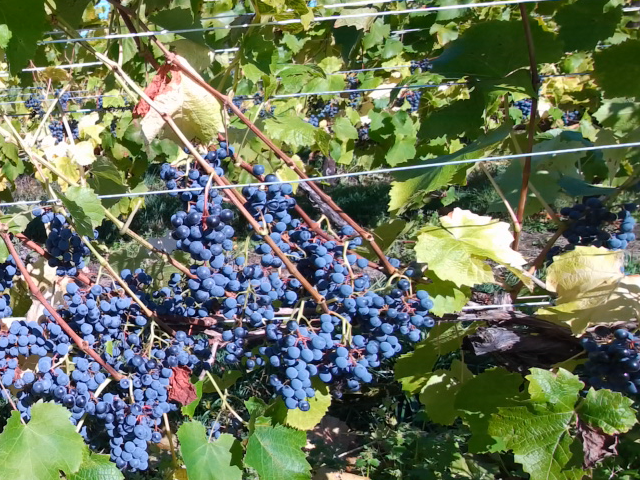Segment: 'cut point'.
Here are the masks:
<instances>
[{
    "label": "cut point",
    "mask_w": 640,
    "mask_h": 480,
    "mask_svg": "<svg viewBox=\"0 0 640 480\" xmlns=\"http://www.w3.org/2000/svg\"><path fill=\"white\" fill-rule=\"evenodd\" d=\"M352 245L350 240H346L343 245H342V249H341V261L343 263L344 268L347 271H350L352 269V266L347 262L346 260V255L348 254V250L349 247Z\"/></svg>",
    "instance_id": "obj_3"
},
{
    "label": "cut point",
    "mask_w": 640,
    "mask_h": 480,
    "mask_svg": "<svg viewBox=\"0 0 640 480\" xmlns=\"http://www.w3.org/2000/svg\"><path fill=\"white\" fill-rule=\"evenodd\" d=\"M256 234L257 232L254 229H249L246 232L245 238H244V244H243V252L245 254H248L250 252L251 240H252V237L255 236Z\"/></svg>",
    "instance_id": "obj_5"
},
{
    "label": "cut point",
    "mask_w": 640,
    "mask_h": 480,
    "mask_svg": "<svg viewBox=\"0 0 640 480\" xmlns=\"http://www.w3.org/2000/svg\"><path fill=\"white\" fill-rule=\"evenodd\" d=\"M329 315H335L340 320V322L342 323V329H341L340 335L342 337H345L349 332V322H347L345 318L342 316V314H340L336 310L330 311Z\"/></svg>",
    "instance_id": "obj_4"
},
{
    "label": "cut point",
    "mask_w": 640,
    "mask_h": 480,
    "mask_svg": "<svg viewBox=\"0 0 640 480\" xmlns=\"http://www.w3.org/2000/svg\"><path fill=\"white\" fill-rule=\"evenodd\" d=\"M405 280L407 281L409 279V277L406 275V273H401L398 272L397 270H394L385 280V288L387 290H390L392 288V282L394 280Z\"/></svg>",
    "instance_id": "obj_1"
},
{
    "label": "cut point",
    "mask_w": 640,
    "mask_h": 480,
    "mask_svg": "<svg viewBox=\"0 0 640 480\" xmlns=\"http://www.w3.org/2000/svg\"><path fill=\"white\" fill-rule=\"evenodd\" d=\"M315 300L313 295H308L306 297L300 298L297 302H296V316L298 318H301L303 316V312L305 310V306L308 303H311Z\"/></svg>",
    "instance_id": "obj_2"
},
{
    "label": "cut point",
    "mask_w": 640,
    "mask_h": 480,
    "mask_svg": "<svg viewBox=\"0 0 640 480\" xmlns=\"http://www.w3.org/2000/svg\"><path fill=\"white\" fill-rule=\"evenodd\" d=\"M212 179L213 177L207 172L206 180L203 182V185L205 186V190L202 191V196H201V200L204 202V204H206L209 199V186Z\"/></svg>",
    "instance_id": "obj_6"
}]
</instances>
